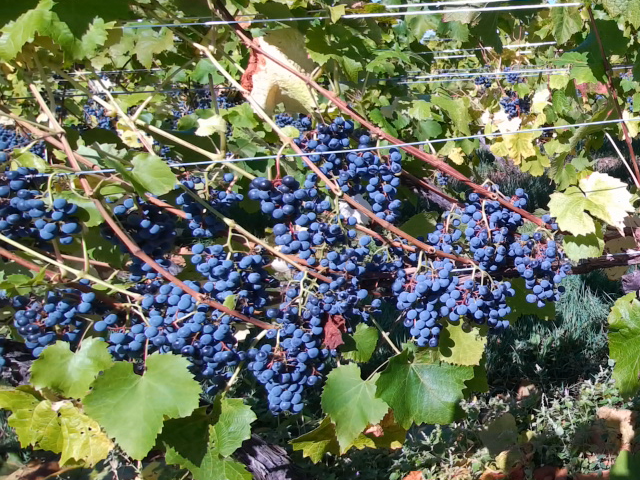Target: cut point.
Returning a JSON list of instances; mask_svg holds the SVG:
<instances>
[{"mask_svg": "<svg viewBox=\"0 0 640 480\" xmlns=\"http://www.w3.org/2000/svg\"><path fill=\"white\" fill-rule=\"evenodd\" d=\"M306 85H307V88H308V91H309L310 97H311V99H312V102L314 103V105H315L316 109H319V105H318V102H317V101H316V99H315V96H314V94H313L312 88H311L307 83H306Z\"/></svg>", "mask_w": 640, "mask_h": 480, "instance_id": "6a23745f", "label": "cut point"}, {"mask_svg": "<svg viewBox=\"0 0 640 480\" xmlns=\"http://www.w3.org/2000/svg\"><path fill=\"white\" fill-rule=\"evenodd\" d=\"M287 146V144L284 142L283 145L280 147L279 151H278V158L276 161V171H279V163H280V154L282 153V151L284 150V148Z\"/></svg>", "mask_w": 640, "mask_h": 480, "instance_id": "7d7e1d6f", "label": "cut point"}, {"mask_svg": "<svg viewBox=\"0 0 640 480\" xmlns=\"http://www.w3.org/2000/svg\"><path fill=\"white\" fill-rule=\"evenodd\" d=\"M541 229L545 232V234H546L549 238L554 239V236H553L551 233H549V231L547 230V228H546L545 226H544V227H540V226H538L536 229H534V232H538V231H539V230H541Z\"/></svg>", "mask_w": 640, "mask_h": 480, "instance_id": "deb38ca7", "label": "cut point"}, {"mask_svg": "<svg viewBox=\"0 0 640 480\" xmlns=\"http://www.w3.org/2000/svg\"><path fill=\"white\" fill-rule=\"evenodd\" d=\"M488 197L485 196V198L483 199V201L481 202V212H482V219H486V213L484 211V205L487 202Z\"/></svg>", "mask_w": 640, "mask_h": 480, "instance_id": "40658cd0", "label": "cut point"}, {"mask_svg": "<svg viewBox=\"0 0 640 480\" xmlns=\"http://www.w3.org/2000/svg\"><path fill=\"white\" fill-rule=\"evenodd\" d=\"M56 172H59V170H55V171H53V172L50 174V177L48 178V181H47V191H51L50 184H51V181H52L53 177L55 176V173H56Z\"/></svg>", "mask_w": 640, "mask_h": 480, "instance_id": "1e8049ac", "label": "cut point"}]
</instances>
